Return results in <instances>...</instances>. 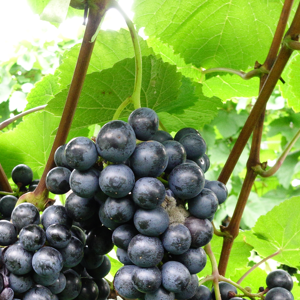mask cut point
<instances>
[{"instance_id": "7d7e1d6f", "label": "cut point", "mask_w": 300, "mask_h": 300, "mask_svg": "<svg viewBox=\"0 0 300 300\" xmlns=\"http://www.w3.org/2000/svg\"><path fill=\"white\" fill-rule=\"evenodd\" d=\"M204 250L207 253L209 260L212 266V285L219 282V274H218V266L216 263L215 256L213 254L211 243L209 242L207 245L204 246Z\"/></svg>"}, {"instance_id": "6a23745f", "label": "cut point", "mask_w": 300, "mask_h": 300, "mask_svg": "<svg viewBox=\"0 0 300 300\" xmlns=\"http://www.w3.org/2000/svg\"><path fill=\"white\" fill-rule=\"evenodd\" d=\"M109 9L115 8L118 13L122 16L125 24L129 28L132 44L135 52V84H134V96L133 104L134 108L138 109L141 107V92H142V55L139 45L138 35L134 28L133 21L129 19L127 13L121 8L120 4L116 0H111Z\"/></svg>"}]
</instances>
